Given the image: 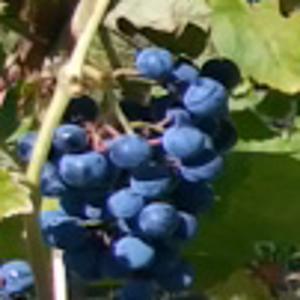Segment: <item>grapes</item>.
<instances>
[{
    "label": "grapes",
    "mask_w": 300,
    "mask_h": 300,
    "mask_svg": "<svg viewBox=\"0 0 300 300\" xmlns=\"http://www.w3.org/2000/svg\"><path fill=\"white\" fill-rule=\"evenodd\" d=\"M35 288L31 265L23 259H10L0 264V300L21 298Z\"/></svg>",
    "instance_id": "grapes-2"
},
{
    "label": "grapes",
    "mask_w": 300,
    "mask_h": 300,
    "mask_svg": "<svg viewBox=\"0 0 300 300\" xmlns=\"http://www.w3.org/2000/svg\"><path fill=\"white\" fill-rule=\"evenodd\" d=\"M133 68L171 95L100 111L90 95L71 99L39 173L40 194L59 198L62 209L37 214L45 247L65 251L66 270L81 282L125 279L118 300L195 286L196 269L176 259L179 239L195 238L198 215L213 209L207 183L237 143L227 96L241 80L233 59L198 70L165 47L146 46L133 52Z\"/></svg>",
    "instance_id": "grapes-1"
},
{
    "label": "grapes",
    "mask_w": 300,
    "mask_h": 300,
    "mask_svg": "<svg viewBox=\"0 0 300 300\" xmlns=\"http://www.w3.org/2000/svg\"><path fill=\"white\" fill-rule=\"evenodd\" d=\"M36 132L28 130L25 133H21L17 137V154L21 161L27 162L28 154L34 142Z\"/></svg>",
    "instance_id": "grapes-3"
}]
</instances>
